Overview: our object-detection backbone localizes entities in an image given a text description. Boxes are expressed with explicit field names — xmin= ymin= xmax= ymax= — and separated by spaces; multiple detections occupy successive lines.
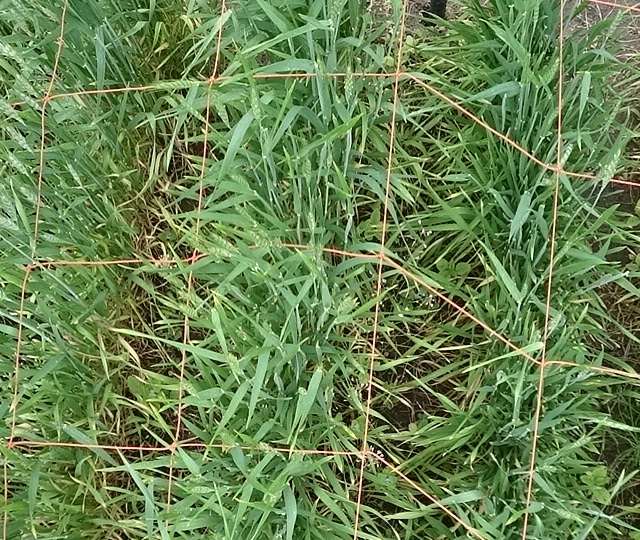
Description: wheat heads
xmin=153 ymin=79 xmax=194 ymax=91
xmin=0 ymin=102 xmax=25 ymax=126
xmin=252 ymin=235 xmax=269 ymax=250
xmin=250 ymin=89 xmax=264 ymax=121
xmin=305 ymin=160 xmax=313 ymax=181
xmin=330 ymin=0 xmax=346 ymax=17
xmin=11 ymin=8 xmax=32 ymax=35
xmin=10 ymin=128 xmax=36 ymax=156
xmin=178 ymin=288 xmax=203 ymax=306
xmin=44 ymin=65 xmax=56 ymax=75
xmin=547 ymin=101 xmax=564 ymax=128
xmin=601 ymin=98 xmax=625 ymax=136
xmin=543 ymin=464 xmax=557 ymax=472
xmin=572 ymin=436 xmax=590 ymax=448
xmin=234 ymin=203 xmax=254 ymax=222
xmin=309 ymin=214 xmax=316 ymax=233
xmin=4 ymin=149 xmax=29 ymax=177
xmin=220 ymin=432 xmax=235 ymax=446
xmin=192 ymin=484 xmax=212 ymax=495
xmin=183 ymin=378 xmax=198 ymax=399
xmin=41 ymin=232 xmax=64 ymax=245
xmin=230 ymin=173 xmax=251 ymax=188
xmin=558 ymin=144 xmax=573 ymax=168
xmin=158 ymin=270 xmax=184 ymax=287
xmin=603 ymin=150 xmax=620 ymax=186
xmin=178 ymin=304 xmax=195 ymax=318
xmin=533 ymin=0 xmax=541 ymax=23
xmin=209 ymin=244 xmax=235 ymax=261
xmin=598 ymin=418 xmax=634 ymax=433
xmin=344 ymin=67 xmax=354 ymax=97
xmin=210 ymin=232 xmax=239 ymax=252
xmin=541 ymin=58 xmax=561 ymax=85
xmin=338 ymin=297 xmax=354 ymax=312
xmin=7 ymin=51 xmax=24 ymax=67
xmin=552 ymin=243 xmax=571 ymax=264
xmin=1 ymin=191 xmax=19 ymax=221
xmin=607 ymin=11 xmax=623 ymax=36
xmin=16 ymin=75 xmax=34 ymax=95
xmin=189 ymin=238 xmax=205 ymax=254
xmin=307 ymin=239 xmax=315 ymax=260
xmin=68 ymin=167 xmax=82 ymax=186
xmin=0 ymin=218 xmax=18 ymax=232
xmin=557 ymin=507 xmax=579 ymax=521
xmin=18 ymin=183 xmax=51 ymax=210
xmin=541 ymin=362 xmax=554 ymax=379
xmin=520 ymin=285 xmax=529 ymax=300
xmin=17 ymin=95 xmax=40 ymax=112
xmin=178 ymin=99 xmax=204 ymax=120
xmin=212 ymin=94 xmax=229 ymax=126
xmin=225 ymin=356 xmax=244 ymax=378
xmin=260 ymin=442 xmax=275 ymax=454
xmin=13 ymin=0 xmax=30 ymax=19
